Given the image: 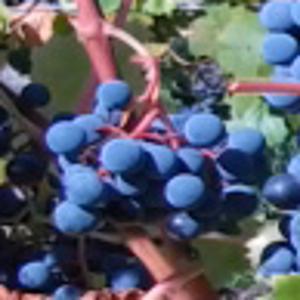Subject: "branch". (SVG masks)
Returning a JSON list of instances; mask_svg holds the SVG:
<instances>
[{
	"mask_svg": "<svg viewBox=\"0 0 300 300\" xmlns=\"http://www.w3.org/2000/svg\"><path fill=\"white\" fill-rule=\"evenodd\" d=\"M102 217L111 232L122 240L134 254L135 260L147 263L151 279L168 300H194L190 288L169 265L163 251L146 234L137 221L121 205L120 201H106Z\"/></svg>",
	"mask_w": 300,
	"mask_h": 300,
	"instance_id": "1",
	"label": "branch"
},
{
	"mask_svg": "<svg viewBox=\"0 0 300 300\" xmlns=\"http://www.w3.org/2000/svg\"><path fill=\"white\" fill-rule=\"evenodd\" d=\"M74 12L85 59L94 79L107 81L119 77L120 63L114 54L100 3L75 0Z\"/></svg>",
	"mask_w": 300,
	"mask_h": 300,
	"instance_id": "2",
	"label": "branch"
},
{
	"mask_svg": "<svg viewBox=\"0 0 300 300\" xmlns=\"http://www.w3.org/2000/svg\"><path fill=\"white\" fill-rule=\"evenodd\" d=\"M0 103L9 115L20 122L30 125L35 131L43 133L47 125L51 124L49 118L35 108L24 104L11 86L0 84Z\"/></svg>",
	"mask_w": 300,
	"mask_h": 300,
	"instance_id": "3",
	"label": "branch"
}]
</instances>
